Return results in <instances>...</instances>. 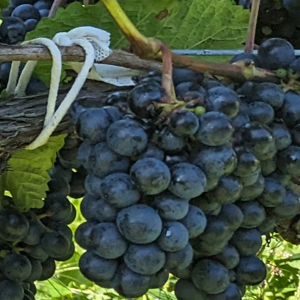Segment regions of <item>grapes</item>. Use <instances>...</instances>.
Here are the masks:
<instances>
[{"instance_id": "grapes-2", "label": "grapes", "mask_w": 300, "mask_h": 300, "mask_svg": "<svg viewBox=\"0 0 300 300\" xmlns=\"http://www.w3.org/2000/svg\"><path fill=\"white\" fill-rule=\"evenodd\" d=\"M0 13V41L7 45L22 42L42 18L49 17L54 0H10Z\"/></svg>"}, {"instance_id": "grapes-1", "label": "grapes", "mask_w": 300, "mask_h": 300, "mask_svg": "<svg viewBox=\"0 0 300 300\" xmlns=\"http://www.w3.org/2000/svg\"><path fill=\"white\" fill-rule=\"evenodd\" d=\"M79 110L55 154L46 207L0 210V300H32L75 250L123 297L180 278L179 300H237L266 275L261 235L300 233V95L172 66Z\"/></svg>"}, {"instance_id": "grapes-3", "label": "grapes", "mask_w": 300, "mask_h": 300, "mask_svg": "<svg viewBox=\"0 0 300 300\" xmlns=\"http://www.w3.org/2000/svg\"><path fill=\"white\" fill-rule=\"evenodd\" d=\"M258 61L266 69L288 68L292 73L300 71V60L295 58L291 42L281 37L269 38L260 45Z\"/></svg>"}]
</instances>
